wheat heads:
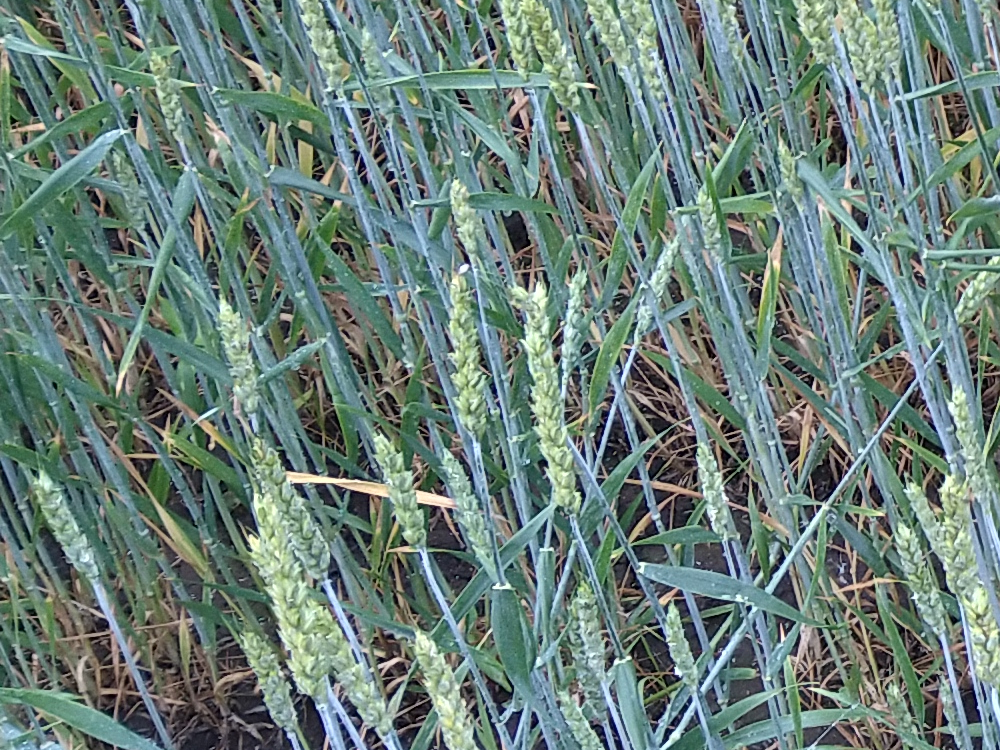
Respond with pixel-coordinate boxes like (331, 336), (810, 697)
(954, 240), (1000, 324)
(247, 535), (388, 729)
(520, 0), (580, 106)
(779, 143), (805, 210)
(770, 0), (834, 63)
(886, 683), (921, 750)
(373, 435), (426, 547)
(326, 337), (357, 407)
(894, 525), (946, 635)
(697, 444), (731, 537)
(493, 0), (535, 79)
(231, 0), (277, 20)
(112, 152), (147, 227)
(449, 274), (489, 435)
(831, 0), (881, 90)
(414, 637), (521, 750)
(149, 53), (183, 136)
(549, 477), (581, 513)
(703, 0), (745, 63)
(607, 0), (665, 99)
(566, 0), (630, 69)
(939, 675), (965, 749)
(664, 606), (698, 691)
(697, 189), (724, 264)
(29, 474), (97, 579)
(604, 0), (642, 39)
(950, 386), (989, 494)
(637, 250), (680, 335)
(441, 451), (494, 567)
(906, 483), (979, 597)
(522, 286), (579, 513)
(361, 29), (392, 119)
(449, 181), (484, 271)
(557, 695), (610, 750)
(218, 300), (259, 413)
(868, 0), (901, 75)
(574, 581), (608, 703)
(623, 0), (658, 40)
(936, 483), (1000, 681)
(248, 442), (331, 582)
(563, 273), (588, 381)
(295, 0), (346, 85)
